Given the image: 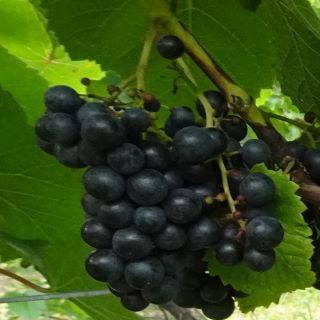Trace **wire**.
Masks as SVG:
<instances>
[{
    "label": "wire",
    "instance_id": "wire-1",
    "mask_svg": "<svg viewBox=\"0 0 320 320\" xmlns=\"http://www.w3.org/2000/svg\"><path fill=\"white\" fill-rule=\"evenodd\" d=\"M100 294H113V293L108 289V290L86 291V292H75V293H63V294H51V295H39V296L11 297V298H0V303L31 301V300H41V299H52V298H63V297L100 295Z\"/></svg>",
    "mask_w": 320,
    "mask_h": 320
}]
</instances>
